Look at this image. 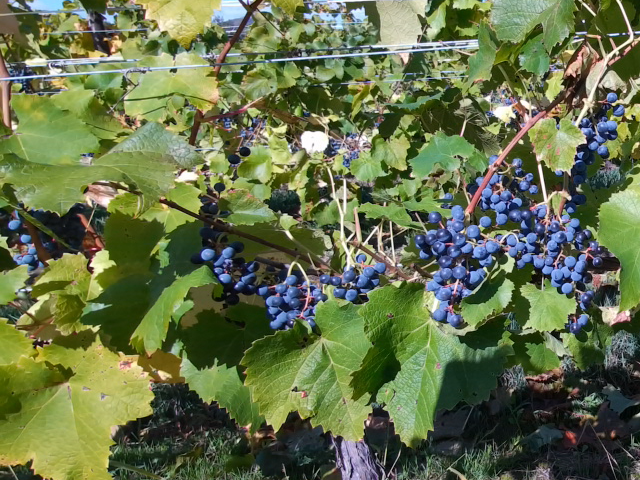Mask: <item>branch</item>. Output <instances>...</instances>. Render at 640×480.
Masks as SVG:
<instances>
[{
  "label": "branch",
  "mask_w": 640,
  "mask_h": 480,
  "mask_svg": "<svg viewBox=\"0 0 640 480\" xmlns=\"http://www.w3.org/2000/svg\"><path fill=\"white\" fill-rule=\"evenodd\" d=\"M567 94L565 89H561L556 97L538 114L534 115L523 127H521L516 135L512 138V140L508 143V145L502 150L498 159L490 166L487 172L483 175L481 183L474 190L472 198L470 200L469 206L465 209V213L470 215L477 206L478 200L480 198L481 193L488 186L490 178L497 172V169L504 163L509 153L514 149L516 144L521 140L524 134L528 133L530 129L537 122L541 121L544 117H546L563 99V97Z\"/></svg>",
  "instance_id": "obj_1"
},
{
  "label": "branch",
  "mask_w": 640,
  "mask_h": 480,
  "mask_svg": "<svg viewBox=\"0 0 640 480\" xmlns=\"http://www.w3.org/2000/svg\"><path fill=\"white\" fill-rule=\"evenodd\" d=\"M160 202L163 203V204L170 205L171 207L176 208V209L182 211L183 213H185L187 215H191L193 217H196L201 222H203V223H205L207 225H211V226H213V227H215L217 229H220L224 233H227V234H230V235L239 236V237H242L243 239L254 241V242H256V243H258L260 245H264V246H266L268 248H271V249H274V250H278V251H282L284 253H287L288 255L297 257V258H299V259H301V260L307 262L308 264H311V265H313V266H315L317 268H321L322 267V264L320 262H318L316 260H313V259L309 258L308 256H306L304 254H301V253H299L297 251H293V250H291L289 248H286L284 246L273 244V243H271V242H269L267 240L260 239V238H258L256 236L249 235V234L243 233L241 231L229 229V228L225 227L222 224H219V223H217V222H215L213 220H209V219L203 217L201 214H199L198 212H196L194 210H190V209L184 207L183 205L174 202L173 200L161 198Z\"/></svg>",
  "instance_id": "obj_2"
},
{
  "label": "branch",
  "mask_w": 640,
  "mask_h": 480,
  "mask_svg": "<svg viewBox=\"0 0 640 480\" xmlns=\"http://www.w3.org/2000/svg\"><path fill=\"white\" fill-rule=\"evenodd\" d=\"M616 4L618 5V7L620 8V10H621V12H622V15H623V18H624V22H625V26H626V28H627V30H628V32H629V39H627V40H625V41L621 42L619 45H617L616 47H614V48H613V49H612L608 54H606V55H605L604 59L602 60V63H601L600 69L597 71V73H596V75H595V77H594V80H593V82H592V85H591V89H590V92H589L588 98H587V99H586V101L584 102V104H583V106H582V108H581V110H580V112H579L578 118H577V120H576V122H575V125H576V126H580V125H581L582 120H583V118H584V114H585L586 110L588 109V106H589V105L591 104V102L593 101V97H594V95H595V92H596V88H597L598 82H599V80H600V77L602 76V73L605 71V68H606V66H607V62H608V61H609V60H610V59H611V58H612V57H613V56H614L618 51H620L622 48H624V47H626V46H628V45H630V44H633V43H634L635 34H634V30H633V28H632V26H631V23H630V19H629L628 12H627V10H626V8H625V6H624V4L622 3V1H621V0H616Z\"/></svg>",
  "instance_id": "obj_3"
},
{
  "label": "branch",
  "mask_w": 640,
  "mask_h": 480,
  "mask_svg": "<svg viewBox=\"0 0 640 480\" xmlns=\"http://www.w3.org/2000/svg\"><path fill=\"white\" fill-rule=\"evenodd\" d=\"M1 84V118L6 127H11V108L9 101L11 100V90L14 82L2 80Z\"/></svg>",
  "instance_id": "obj_4"
},
{
  "label": "branch",
  "mask_w": 640,
  "mask_h": 480,
  "mask_svg": "<svg viewBox=\"0 0 640 480\" xmlns=\"http://www.w3.org/2000/svg\"><path fill=\"white\" fill-rule=\"evenodd\" d=\"M261 3H262V0H255L254 2L251 3V6L248 8L245 17L242 20V23L239 25V29H237L235 31V33L231 36V38L228 40V42L224 46L222 52L220 53V56L216 60V63H220V62H224L225 61L224 57L226 56V53L231 48V46L234 43V41L239 37V35L241 34V31H243L244 28L246 27L248 21L250 20V17L252 15V13L257 10V6L260 5Z\"/></svg>",
  "instance_id": "obj_5"
},
{
  "label": "branch",
  "mask_w": 640,
  "mask_h": 480,
  "mask_svg": "<svg viewBox=\"0 0 640 480\" xmlns=\"http://www.w3.org/2000/svg\"><path fill=\"white\" fill-rule=\"evenodd\" d=\"M350 245L353 247H357L359 248L362 252H364L366 255H369L371 257H373L376 261L378 262H383L386 264V267L388 269H390L391 271H393L394 273H396L400 278H403L405 280L409 279V275L403 273L399 268H396L394 265H392L391 263H388L386 260H384L381 256H379L377 253H375L372 250H369L368 248H366L364 245H362L360 242H356V241H351Z\"/></svg>",
  "instance_id": "obj_6"
},
{
  "label": "branch",
  "mask_w": 640,
  "mask_h": 480,
  "mask_svg": "<svg viewBox=\"0 0 640 480\" xmlns=\"http://www.w3.org/2000/svg\"><path fill=\"white\" fill-rule=\"evenodd\" d=\"M571 193L569 192V173L565 172L564 176H563V186H562V194H561V200L559 203V208L558 211L555 215V219L559 220L563 214V210H564V206H565V202H566V198L570 197Z\"/></svg>",
  "instance_id": "obj_7"
},
{
  "label": "branch",
  "mask_w": 640,
  "mask_h": 480,
  "mask_svg": "<svg viewBox=\"0 0 640 480\" xmlns=\"http://www.w3.org/2000/svg\"><path fill=\"white\" fill-rule=\"evenodd\" d=\"M92 185L93 186H113L115 188H121L124 191L130 192V193H132V194H134L136 196H141L142 195L141 191H138L135 188L129 187L126 184L118 183V182H115V181H93Z\"/></svg>",
  "instance_id": "obj_8"
},
{
  "label": "branch",
  "mask_w": 640,
  "mask_h": 480,
  "mask_svg": "<svg viewBox=\"0 0 640 480\" xmlns=\"http://www.w3.org/2000/svg\"><path fill=\"white\" fill-rule=\"evenodd\" d=\"M203 119V114L200 110H197L195 112V116H194V121L192 124V129H191V134H190V139L188 141L189 145H194L196 143V139L198 136V132L200 129V125H201V121Z\"/></svg>",
  "instance_id": "obj_9"
}]
</instances>
